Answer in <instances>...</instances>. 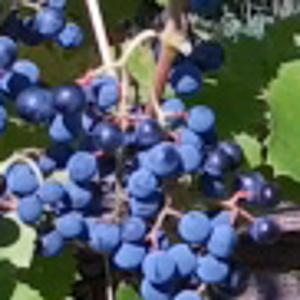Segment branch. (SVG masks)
<instances>
[{
    "mask_svg": "<svg viewBox=\"0 0 300 300\" xmlns=\"http://www.w3.org/2000/svg\"><path fill=\"white\" fill-rule=\"evenodd\" d=\"M168 25L164 32V41L156 67V85L150 91L147 101V113L154 115L162 104L165 92L169 87V72L175 62L179 40L183 36V24L190 12L188 0L169 1Z\"/></svg>",
    "mask_w": 300,
    "mask_h": 300,
    "instance_id": "1",
    "label": "branch"
}]
</instances>
